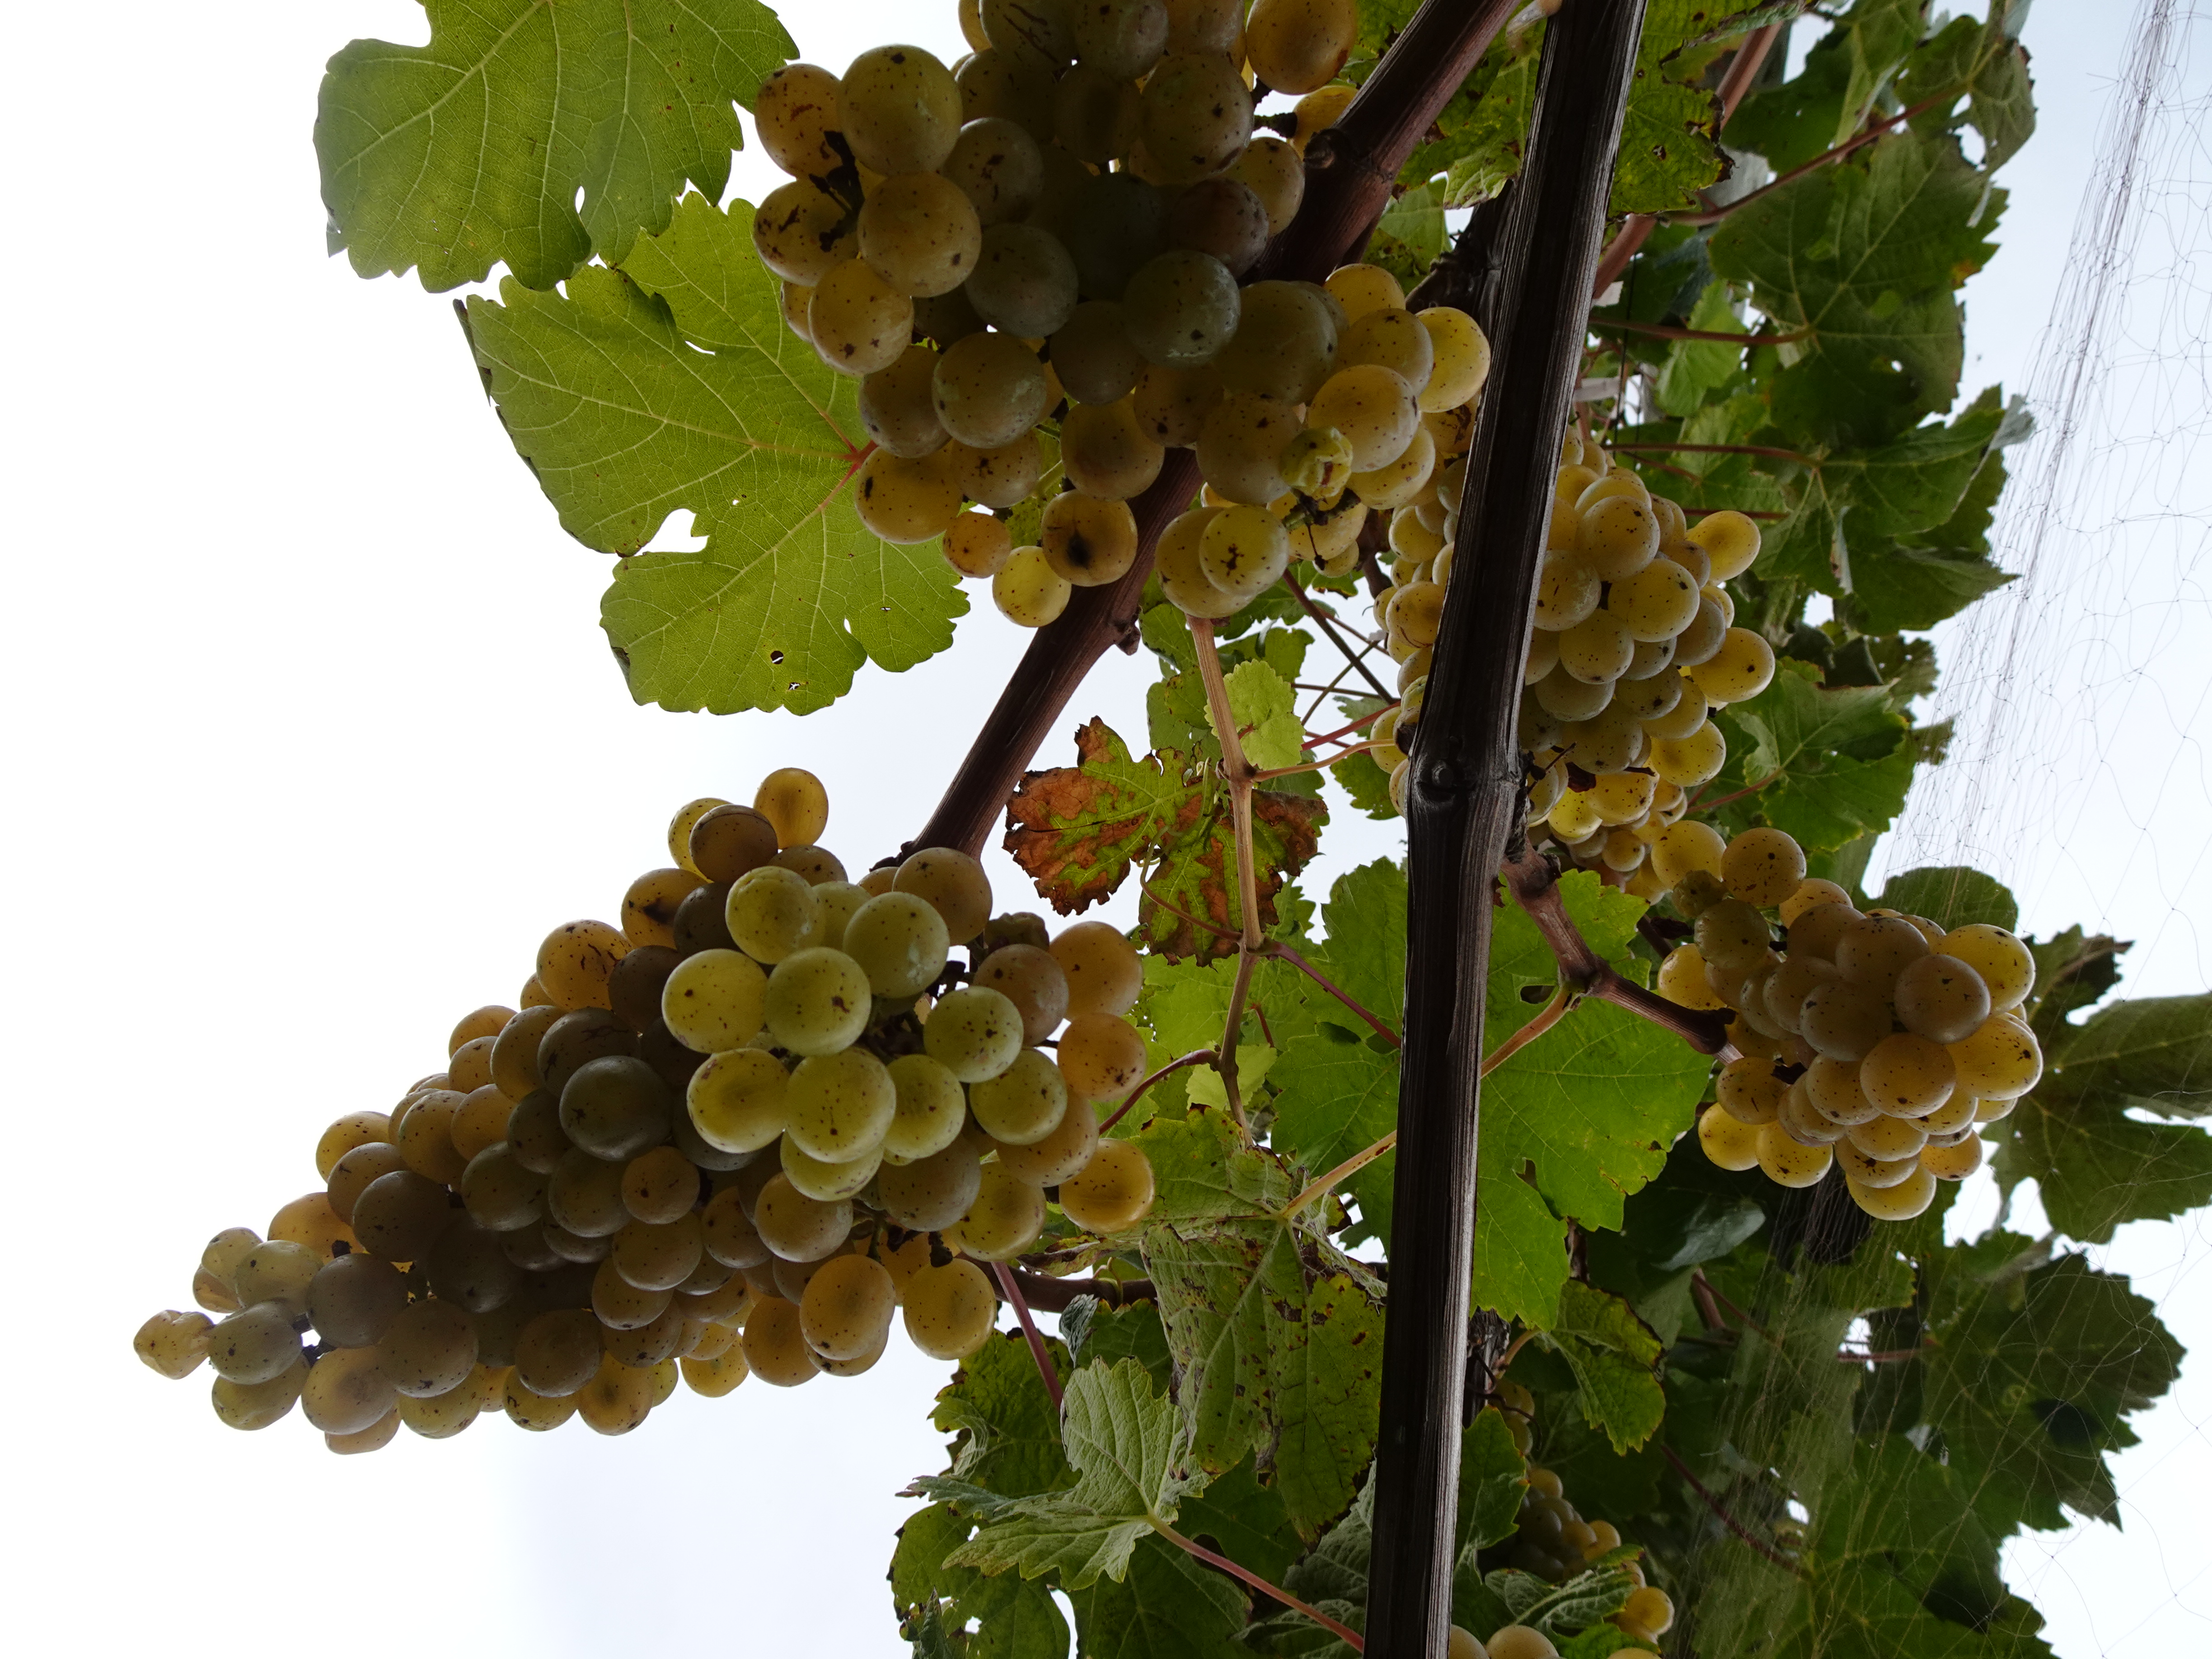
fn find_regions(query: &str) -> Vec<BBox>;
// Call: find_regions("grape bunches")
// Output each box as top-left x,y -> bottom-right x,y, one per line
1365,408 -> 1780,907
751,4 -> 1503,631
1652,821 -> 2039,1226
1444,1621 -> 1694,1659
1481,1378 -> 1676,1638
129,763 -> 1154,1454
